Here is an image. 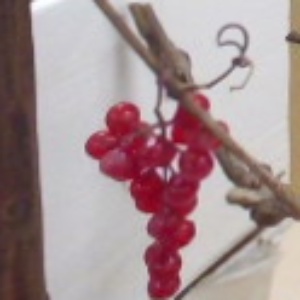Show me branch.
Returning a JSON list of instances; mask_svg holds the SVG:
<instances>
[{
	"label": "branch",
	"mask_w": 300,
	"mask_h": 300,
	"mask_svg": "<svg viewBox=\"0 0 300 300\" xmlns=\"http://www.w3.org/2000/svg\"><path fill=\"white\" fill-rule=\"evenodd\" d=\"M93 3L124 36L133 51L144 61V64L149 67L152 74L167 88L168 96L179 99L192 115L203 120L224 142V146H220L214 150V155L220 163L224 176L237 187L250 188L253 192H261L263 185H266L275 192V198L272 201H252L248 196L233 197L226 195L228 205H239L243 210H250L249 220L256 222L257 228L230 247L214 264L209 265L207 267L208 269L190 280L182 290L177 292L174 300H181L231 255L257 237L265 227L276 226L285 217H293L296 220H300V212L297 208V204L292 200L290 191L280 182L281 177L285 175V170H282V172L274 178L271 164H257L254 160L249 158L242 151L244 144L214 123L195 100L197 89L212 88L214 84H217L231 75L236 66L241 69L249 68V73L241 84L231 86L229 92L244 89L247 86L252 78L254 67L252 60L244 58L245 51L250 44V35L244 27L236 23H226L219 29L217 34L218 44L226 45L227 43H232L239 49L240 53L232 60V66L230 68L214 78L209 85L201 86L197 85L190 75V54L183 49L176 48L168 38L151 4L146 3L145 6H142L138 3H132L128 5L130 17L137 25L142 39L148 44L147 49L133 29L125 23L124 19L116 14L108 0H93ZM231 27L240 29L243 32L245 36L243 48L235 40L221 41V34ZM231 153L249 168V170H246L244 166L236 165L235 160L231 158Z\"/></svg>",
	"instance_id": "obj_1"
}]
</instances>
